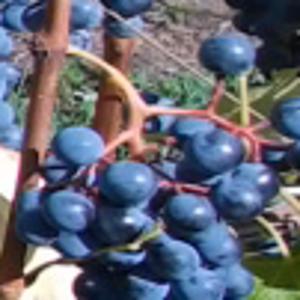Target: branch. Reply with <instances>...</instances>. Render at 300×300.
Segmentation results:
<instances>
[{
	"label": "branch",
	"mask_w": 300,
	"mask_h": 300,
	"mask_svg": "<svg viewBox=\"0 0 300 300\" xmlns=\"http://www.w3.org/2000/svg\"><path fill=\"white\" fill-rule=\"evenodd\" d=\"M72 19L71 0H51L49 14L42 32V48L33 81V96L18 176L13 193L16 196L39 187V176L45 159L49 137L52 104L61 80L60 62L67 51V38Z\"/></svg>",
	"instance_id": "1"
},
{
	"label": "branch",
	"mask_w": 300,
	"mask_h": 300,
	"mask_svg": "<svg viewBox=\"0 0 300 300\" xmlns=\"http://www.w3.org/2000/svg\"><path fill=\"white\" fill-rule=\"evenodd\" d=\"M100 74L92 128L98 130L108 144L119 135V125L126 110V93L108 71L101 70Z\"/></svg>",
	"instance_id": "2"
},
{
	"label": "branch",
	"mask_w": 300,
	"mask_h": 300,
	"mask_svg": "<svg viewBox=\"0 0 300 300\" xmlns=\"http://www.w3.org/2000/svg\"><path fill=\"white\" fill-rule=\"evenodd\" d=\"M10 210L3 229V249L0 255V300H23V269L28 249L15 241Z\"/></svg>",
	"instance_id": "3"
},
{
	"label": "branch",
	"mask_w": 300,
	"mask_h": 300,
	"mask_svg": "<svg viewBox=\"0 0 300 300\" xmlns=\"http://www.w3.org/2000/svg\"><path fill=\"white\" fill-rule=\"evenodd\" d=\"M104 41L103 60L113 64L124 77H128V67L136 41L118 40L102 32Z\"/></svg>",
	"instance_id": "4"
}]
</instances>
